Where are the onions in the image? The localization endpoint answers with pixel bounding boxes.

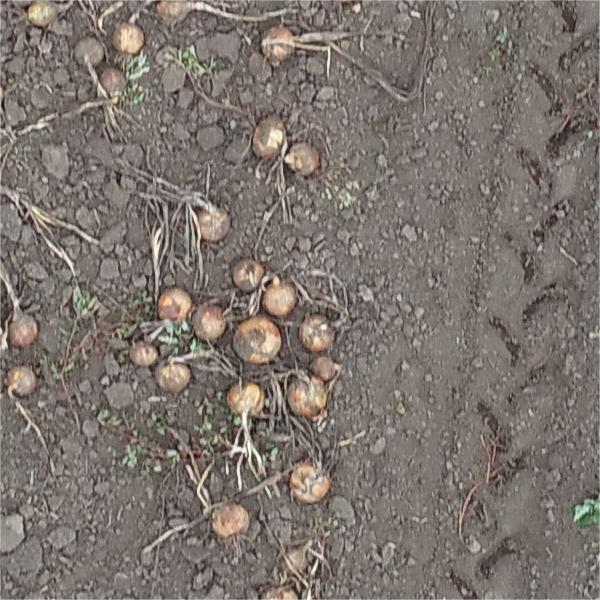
[233,315,281,362]
[6,316,38,345]
[154,357,189,392]
[5,365,36,394]
[226,381,264,417]
[306,354,335,380]
[156,285,192,321]
[25,0,57,28]
[284,141,318,174]
[289,463,330,501]
[156,0,194,19]
[285,375,326,415]
[230,256,262,287]
[297,314,332,350]
[73,38,103,69]
[189,201,228,241]
[94,66,123,95]
[262,279,296,315]
[191,302,225,340]
[280,535,314,576]
[249,118,286,157]
[260,26,293,64]
[209,501,247,537]
[128,338,158,364]
[261,583,300,600]
[108,22,144,55]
